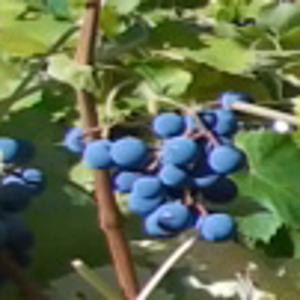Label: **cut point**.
Wrapping results in <instances>:
<instances>
[{
    "label": "cut point",
    "instance_id": "cut-point-1",
    "mask_svg": "<svg viewBox=\"0 0 300 300\" xmlns=\"http://www.w3.org/2000/svg\"><path fill=\"white\" fill-rule=\"evenodd\" d=\"M93 70L95 72H107L110 74H122L126 77L132 79L135 84L140 88L145 101L150 112H155L157 110V103L167 104L169 102V97L161 93H153L147 81L142 77V75L135 69L127 65H115L111 63H100L95 62L93 64Z\"/></svg>",
    "mask_w": 300,
    "mask_h": 300
}]
</instances>
